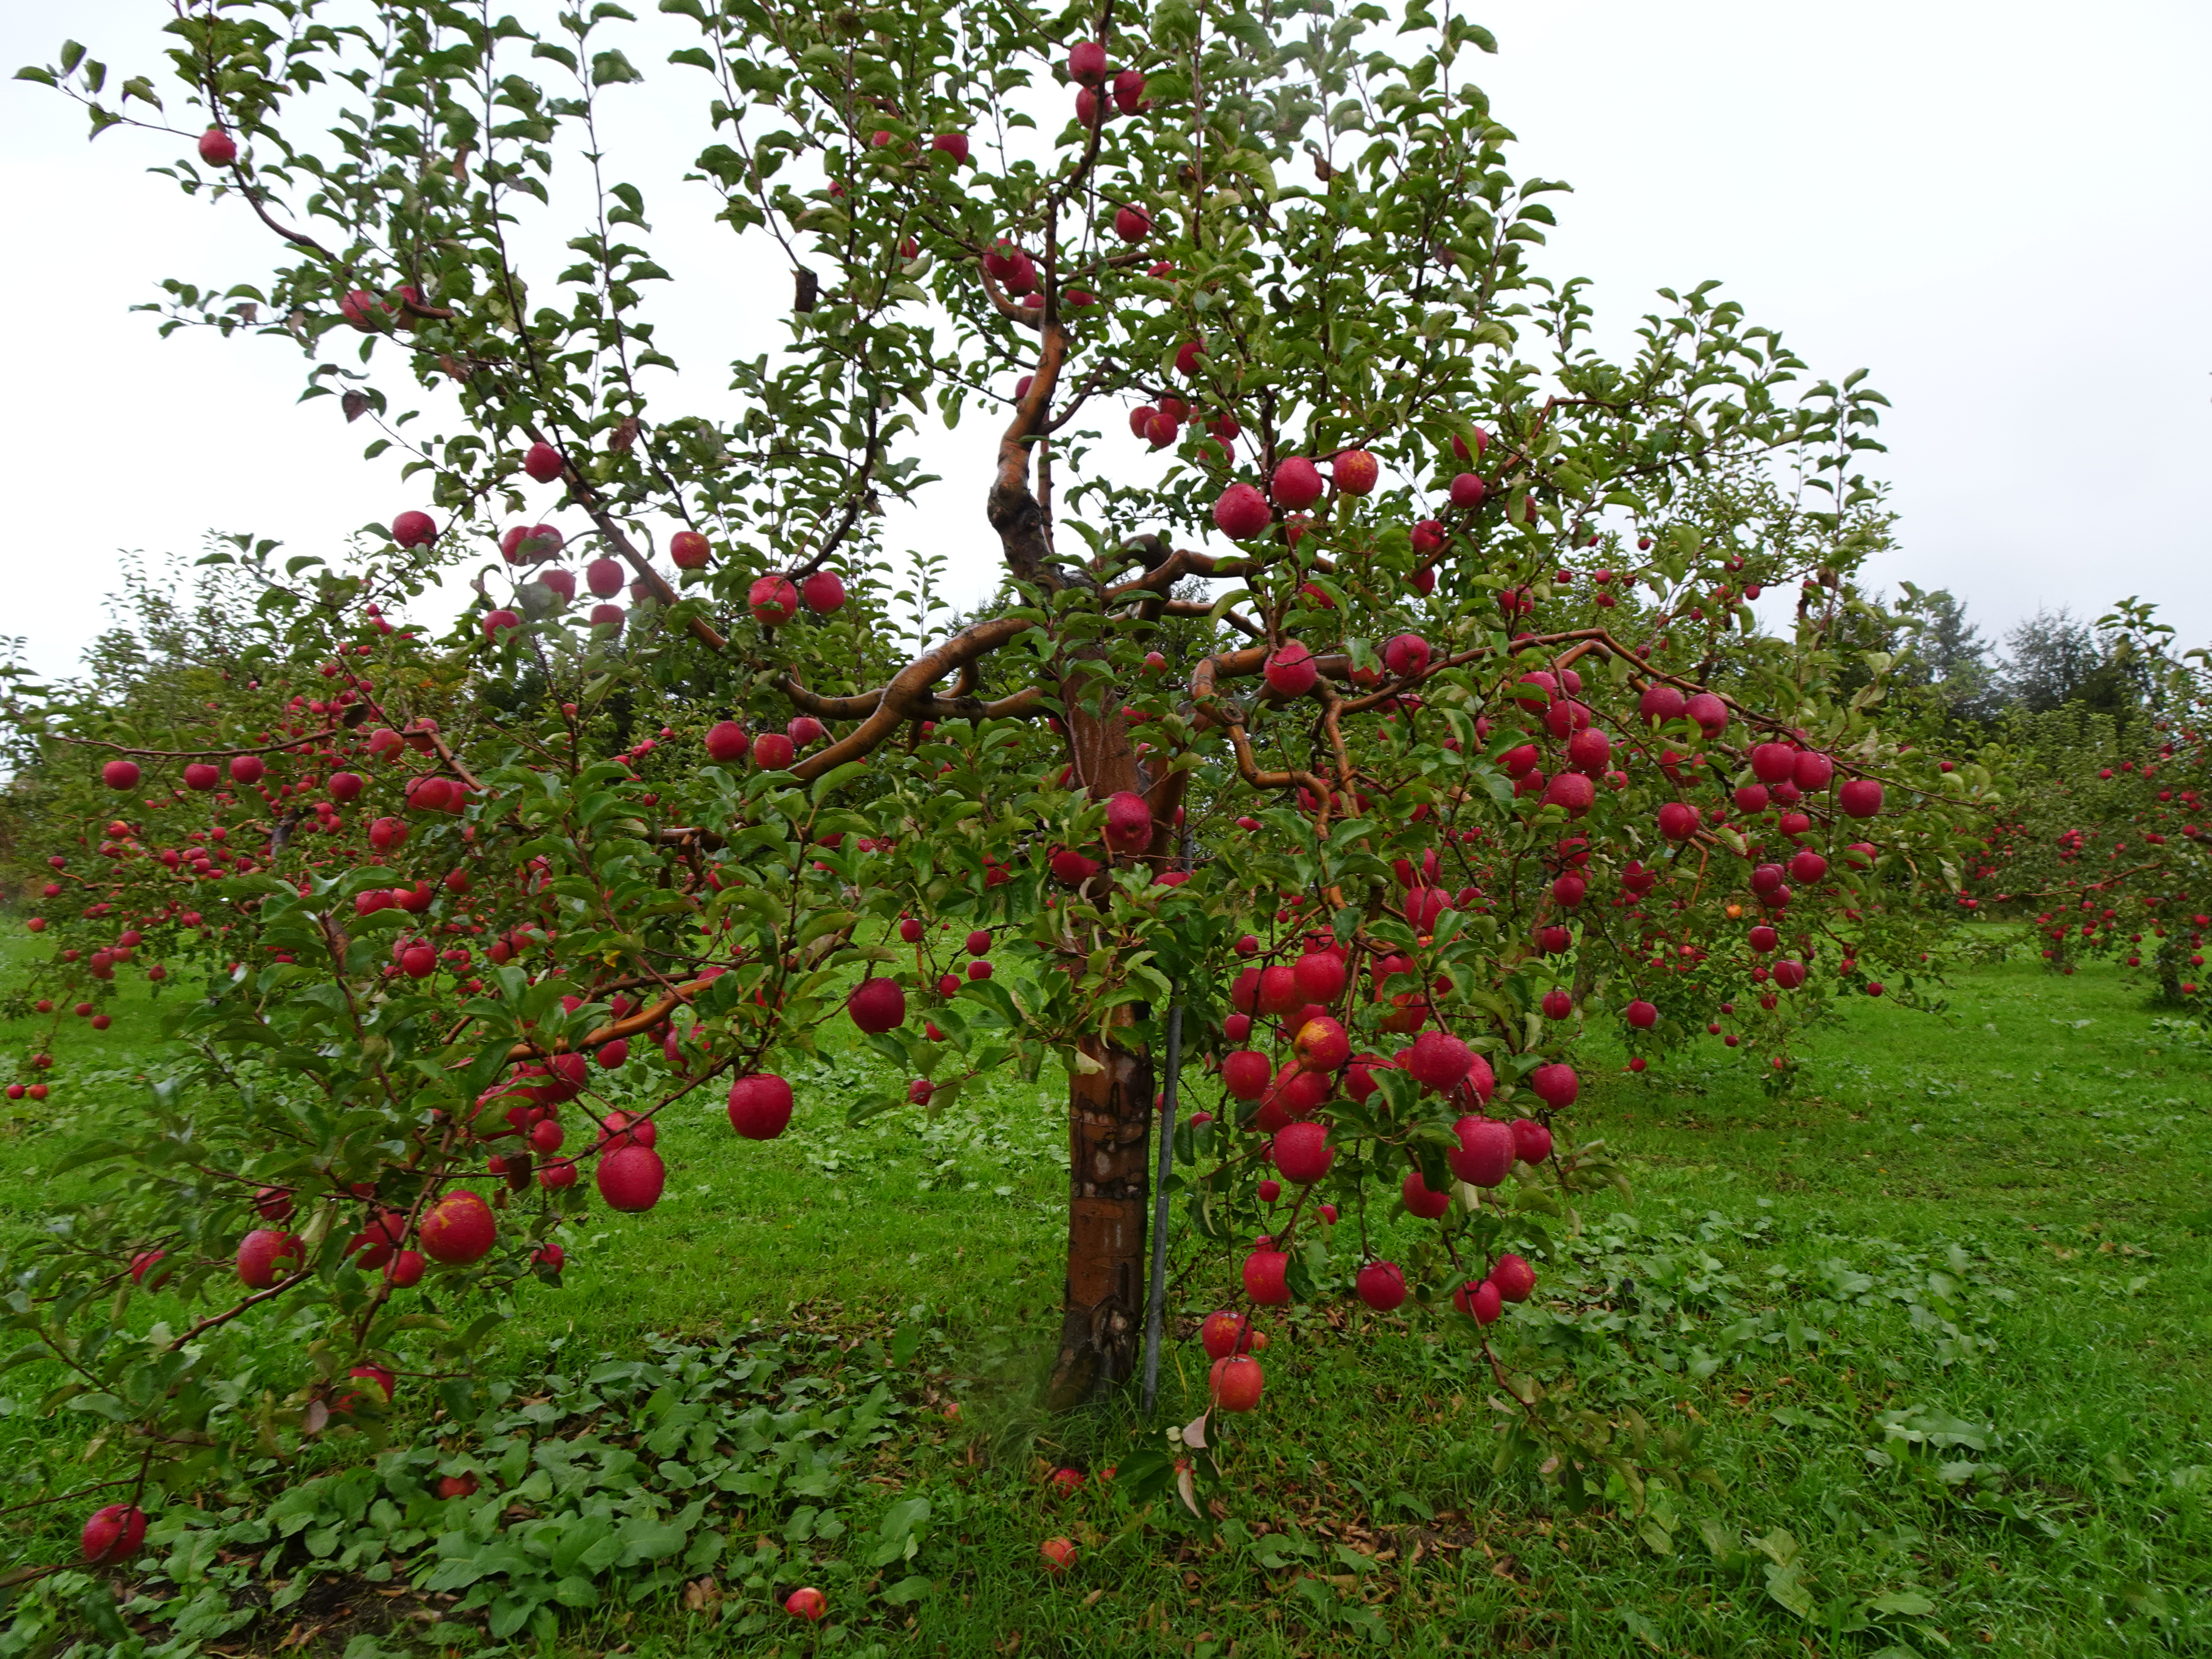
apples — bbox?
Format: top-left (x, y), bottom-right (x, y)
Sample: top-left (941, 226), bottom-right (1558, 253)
top-left (909, 1079), bottom-right (934, 1106)
top-left (1224, 1014), bottom-right (1250, 1042)
top-left (1233, 935), bottom-right (1259, 959)
top-left (1532, 1064), bottom-right (1578, 1111)
top-left (590, 604), bottom-right (625, 635)
top-left (858, 837), bottom-right (885, 852)
top-left (1458, 887), bottom-right (1482, 909)
top-left (537, 569), bottom-right (575, 605)
top-left (1752, 743), bottom-right (1795, 783)
top-left (370, 728), bottom-right (405, 763)
top-left (341, 1205), bottom-right (405, 1269)
top-left (1370, 937), bottom-right (1405, 982)
top-left (1003, 256), bottom-right (1036, 296)
top-left (1501, 584), bottom-right (1532, 615)
top-left (1373, 979), bottom-right (1430, 1034)
top-left (1174, 804), bottom-right (1183, 828)
top-left (1199, 435), bottom-right (1234, 470)
top-left (1104, 791), bottom-right (1151, 843)
top-left (511, 921), bottom-right (538, 946)
top-left (1354, 1060), bottom-right (1399, 1110)
top-left (715, 861), bottom-right (742, 885)
top-left (392, 510), bottom-right (437, 550)
top-left (1768, 777), bottom-right (1801, 807)
top-left (1552, 669), bottom-right (1581, 696)
top-left (1294, 952), bottom-right (1346, 1005)
top-left (487, 1153), bottom-right (507, 1175)
top-left (1402, 1172), bottom-right (1449, 1219)
top-left (1792, 851), bottom-right (1826, 885)
top-left (630, 575), bottom-right (662, 608)
top-left (1356, 1261), bottom-right (1405, 1312)
top-left (1474, 715), bottom-right (1494, 739)
top-left (1520, 767), bottom-right (1543, 791)
top-left (1298, 778), bottom-right (1344, 819)
top-left (536, 878), bottom-right (558, 912)
top-left (1365, 781), bottom-right (1385, 794)
top-left (1447, 1115), bottom-right (1515, 1188)
top-left (525, 523), bottom-right (563, 558)
top-left (1488, 1253), bottom-right (1535, 1304)
top-left (1569, 729), bottom-right (1610, 771)
top-left (532, 1052), bottom-right (586, 1103)
top-left (557, 995), bottom-right (583, 1038)
top-left (402, 947), bottom-right (436, 978)
top-left (1210, 413), bottom-right (1239, 440)
top-left (369, 817), bottom-right (410, 852)
top-left (1749, 868), bottom-right (1779, 895)
top-left (1129, 406), bottom-right (1160, 438)
top-left (1213, 483), bottom-right (1271, 540)
top-left (1410, 520), bottom-right (1445, 554)
top-left (1190, 1112), bottom-right (1213, 1129)
top-left (1400, 936), bottom-right (1463, 995)
top-left (340, 1181), bottom-right (374, 1198)
top-left (900, 236), bottom-right (916, 271)
top-left (602, 887), bottom-right (638, 912)
top-left (586, 558), bottom-right (624, 599)
top-left (1393, 848), bottom-right (1440, 891)
top-left (526, 1102), bottom-right (557, 1129)
top-left (1048, 838), bottom-right (1104, 886)
top-left (82, 1504), bottom-right (145, 1566)
top-left (1516, 671), bottom-right (1559, 716)
top-left (1514, 632), bottom-right (1536, 656)
top-left (1411, 568), bottom-right (1434, 598)
top-left (1142, 650), bottom-right (1168, 675)
top-left (443, 1127), bottom-right (476, 1161)
top-left (328, 771), bottom-right (366, 802)
top-left (1345, 1052), bottom-right (1379, 1099)
top-left (816, 833), bottom-right (843, 846)
top-left (598, 1040), bottom-right (627, 1069)
top-left (1621, 860), bottom-right (1654, 890)
top-left (1777, 730), bottom-right (1806, 754)
top-left (1156, 1093), bottom-right (1178, 1114)
top-left (1243, 1251), bottom-right (1292, 1306)
top-left (511, 1062), bottom-right (531, 1077)
top-left (1378, 715), bottom-right (1396, 740)
top-left (1275, 1058), bottom-right (1331, 1119)
top-left (1393, 1047), bottom-right (1434, 1098)
top-left (1121, 705), bottom-right (1145, 726)
top-left (393, 878), bottom-right (434, 915)
top-left (1773, 959), bottom-right (1805, 989)
top-left (526, 442), bottom-right (564, 484)
top-left (753, 733), bottom-right (793, 770)
top-left (341, 289), bottom-right (389, 333)
top-left (1023, 293), bottom-right (1044, 308)
top-left (1553, 877), bottom-right (1585, 907)
top-left (1159, 389), bottom-right (1191, 425)
top-left (920, 721), bottom-right (936, 741)
top-left (1604, 771), bottom-right (1627, 793)
top-left (1315, 1204), bottom-right (1337, 1225)
top-left (961, 870), bottom-right (989, 890)
top-left (529, 1120), bottom-right (563, 1156)
top-left (728, 1074), bottom-right (793, 1140)
top-left (1453, 426), bottom-right (1488, 461)
top-left (1431, 722), bottom-right (1450, 730)
top-left (664, 1026), bottom-right (722, 1080)
top-left (482, 610), bottom-right (520, 643)
top-left (1205, 1050), bottom-right (1223, 1070)
top-left (1188, 405), bottom-right (1215, 429)
top-left (597, 1111), bottom-right (656, 1155)
top-left (1257, 1179), bottom-right (1280, 1202)
top-left (328, 1390), bottom-right (362, 1432)
top-left (1293, 1017), bottom-right (1349, 1073)
top-left (705, 720), bottom-right (748, 762)
top-left (1839, 779), bottom-right (1882, 819)
top-left (1151, 871), bottom-right (1193, 919)
top-left (1570, 765), bottom-right (1607, 781)
top-left (1264, 644), bottom-right (1316, 697)
top-left (1076, 87), bottom-right (1112, 129)
top-left (1203, 1311), bottom-right (1253, 1361)
top-left (880, 843), bottom-right (894, 856)
top-left (1349, 656), bottom-right (1384, 689)
top-left (1512, 781), bottom-right (1522, 799)
top-left (742, 982), bottom-right (786, 1028)
top-left (1541, 991), bottom-right (1571, 1020)
top-left (1545, 700), bottom-right (1591, 739)
top-left (883, 831), bottom-right (899, 847)
top-left (938, 975), bottom-right (961, 999)
top-left (1749, 926), bottom-right (1778, 952)
top-left (1276, 1023), bottom-right (1294, 1045)
top-left (1145, 699), bottom-right (1165, 722)
top-left (924, 760), bottom-right (952, 779)
top-left (1356, 792), bottom-right (1372, 814)
top-left (511, 889), bottom-right (527, 910)
top-left (1399, 692), bottom-right (1424, 719)
top-left (900, 919), bottom-right (924, 943)
top-left (199, 129), bottom-right (236, 168)
top-left (387, 285), bottom-right (418, 330)
top-left (1544, 851), bottom-right (1560, 873)
top-left (356, 888), bottom-right (396, 916)
top-left (490, 931), bottom-right (525, 965)
top-left (484, 1086), bottom-right (518, 1096)
top-left (1548, 773), bottom-right (1594, 819)
top-left (1271, 456), bottom-right (1323, 510)
top-left (1641, 687), bottom-right (1683, 730)
top-left (1408, 791), bottom-right (1427, 823)
top-left (1683, 693), bottom-right (1728, 739)
top-left (445, 866), bottom-right (473, 895)
top-left (1016, 376), bottom-right (1035, 399)
top-left (828, 178), bottom-right (859, 207)
top-left (405, 777), bottom-right (452, 811)
top-left (392, 935), bottom-right (427, 964)
top-left (1114, 71), bottom-right (1149, 116)
top-left (516, 855), bottom-right (552, 885)
top-left (1281, 1003), bottom-right (1326, 1038)
top-left (749, 576), bottom-right (798, 626)
top-left (404, 718), bottom-right (439, 752)
top-left (1115, 203), bottom-right (1150, 243)
top-left (419, 1189), bottom-right (495, 1265)
top-left (804, 570), bottom-right (844, 614)
top-left (537, 1158), bottom-right (577, 1194)
top-left (1454, 1279), bottom-right (1501, 1325)
top-left (967, 960), bottom-right (992, 981)
top-left (1477, 899), bottom-right (1496, 914)
top-left (1332, 450), bottom-right (1378, 497)
top-left (1616, 740), bottom-right (1643, 767)
top-left (982, 852), bottom-right (1011, 885)
top-left (1058, 763), bottom-right (1073, 785)
top-left (1304, 924), bottom-right (1349, 965)
top-left (966, 930), bottom-right (991, 956)
top-left (1241, 1124), bottom-right (1258, 1133)
top-left (847, 977), bottom-right (905, 1035)
top-left (431, 1109), bottom-right (441, 1115)
top-left (1541, 925), bottom-right (1572, 954)
top-left (1002, 741), bottom-right (1019, 747)
top-left (1559, 838), bottom-right (1589, 868)
top-left (1659, 743), bottom-right (1706, 789)
top-left (1209, 1354), bottom-right (1262, 1412)
top-left (619, 1037), bottom-right (627, 1045)
top-left (1439, 1052), bottom-right (1494, 1112)
top-left (184, 763), bottom-right (220, 791)
top-left (871, 130), bottom-right (909, 153)
top-left (531, 1244), bottom-right (564, 1276)
top-left (670, 531), bottom-right (711, 568)
top-left (384, 1251), bottom-right (427, 1289)
top-left (985, 237), bottom-right (1024, 281)
top-left (1405, 887), bottom-right (1454, 935)
top-left (1231, 967), bottom-right (1269, 1018)
top-left (1734, 782), bottom-right (1769, 814)
top-left (1037, 774), bottom-right (1057, 788)
top-left (787, 717), bottom-right (823, 746)
top-left (706, 868), bottom-right (734, 892)
top-left (514, 1019), bottom-right (536, 1041)
top-left (1790, 753), bottom-right (1834, 790)
top-left (1627, 1001), bottom-right (1656, 1028)
top-left (1148, 262), bottom-right (1178, 283)
top-left (1846, 842), bottom-right (1876, 869)
top-left (1562, 864), bottom-right (1592, 886)
top-left (1537, 794), bottom-right (1571, 824)
top-left (932, 134), bottom-right (968, 166)
top-left (1255, 1235), bottom-right (1277, 1251)
top-left (1144, 414), bottom-right (1178, 448)
top-left (501, 526), bottom-right (532, 566)
top-left (236, 1230), bottom-right (304, 1290)
top-left (1495, 743), bottom-right (1538, 779)
top-left (1659, 802), bottom-right (1701, 841)
top-left (255, 1185), bottom-right (293, 1221)
top-left (1373, 698), bottom-right (1399, 714)
top-left (926, 1020), bottom-right (947, 1042)
top-left (1135, 744), bottom-right (1153, 770)
top-left (1779, 813), bottom-right (1809, 840)
top-left (441, 781), bottom-right (476, 814)
top-left (230, 756), bottom-right (263, 784)
top-left (1255, 1085), bottom-right (1294, 1134)
top-left (1299, 583), bottom-right (1335, 610)
top-left (609, 993), bottom-right (644, 1020)
top-left (349, 1361), bottom-right (393, 1403)
top-left (1259, 965), bottom-right (1308, 1015)
top-left (1260, 1140), bottom-right (1271, 1164)
top-left (1385, 634), bottom-right (1429, 677)
top-left (596, 1146), bottom-right (664, 1213)
top-left (1049, 717), bottom-right (1064, 735)
top-left (1412, 1031), bottom-right (1471, 1091)
top-left (1223, 1051), bottom-right (1271, 1100)
top-left (1273, 1122), bottom-right (1333, 1185)
top-left (131, 1250), bottom-right (171, 1288)
top-left (1505, 495), bottom-right (1537, 523)
top-left (1444, 737), bottom-right (1461, 754)
top-left (102, 761), bottom-right (140, 790)
top-left (1757, 864), bottom-right (1784, 887)
top-left (696, 966), bottom-right (727, 981)
top-left (1284, 513), bottom-right (1310, 548)
top-left (469, 1094), bottom-right (529, 1142)
top-left (812, 860), bottom-right (837, 875)
top-left (646, 1018), bottom-right (674, 1044)
top-left (506, 1073), bottom-right (541, 1104)
top-left (1509, 1119), bottom-right (1551, 1167)
top-left (1069, 42), bottom-right (1106, 87)
top-left (1235, 816), bottom-right (1261, 834)
top-left (1762, 884), bottom-right (1790, 908)
top-left (1175, 338), bottom-right (1206, 377)
top-left (1064, 288), bottom-right (1094, 310)
top-left (1450, 473), bottom-right (1484, 509)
